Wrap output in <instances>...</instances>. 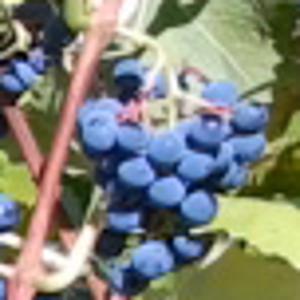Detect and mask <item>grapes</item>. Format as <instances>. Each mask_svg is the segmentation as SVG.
<instances>
[{"label":"grapes","instance_id":"obj_1","mask_svg":"<svg viewBox=\"0 0 300 300\" xmlns=\"http://www.w3.org/2000/svg\"><path fill=\"white\" fill-rule=\"evenodd\" d=\"M147 73L144 62L121 59L114 67L120 97L86 100L75 127L85 156L97 161L99 187L116 193L95 251L115 264L117 297L140 296L175 264L200 260L207 244L187 239L192 224H207L216 213L213 193L243 188L248 165L269 148L265 103L238 102L230 83L211 84L198 69L179 72L172 86Z\"/></svg>","mask_w":300,"mask_h":300},{"label":"grapes","instance_id":"obj_2","mask_svg":"<svg viewBox=\"0 0 300 300\" xmlns=\"http://www.w3.org/2000/svg\"><path fill=\"white\" fill-rule=\"evenodd\" d=\"M18 18L26 29L42 32L43 42L0 70V87L8 94L28 93L46 69L61 61L62 49L71 47L77 40L76 31L63 27L62 19L49 4H24L18 10Z\"/></svg>","mask_w":300,"mask_h":300},{"label":"grapes","instance_id":"obj_3","mask_svg":"<svg viewBox=\"0 0 300 300\" xmlns=\"http://www.w3.org/2000/svg\"><path fill=\"white\" fill-rule=\"evenodd\" d=\"M22 224V212L14 198L0 192V233H10Z\"/></svg>","mask_w":300,"mask_h":300}]
</instances>
